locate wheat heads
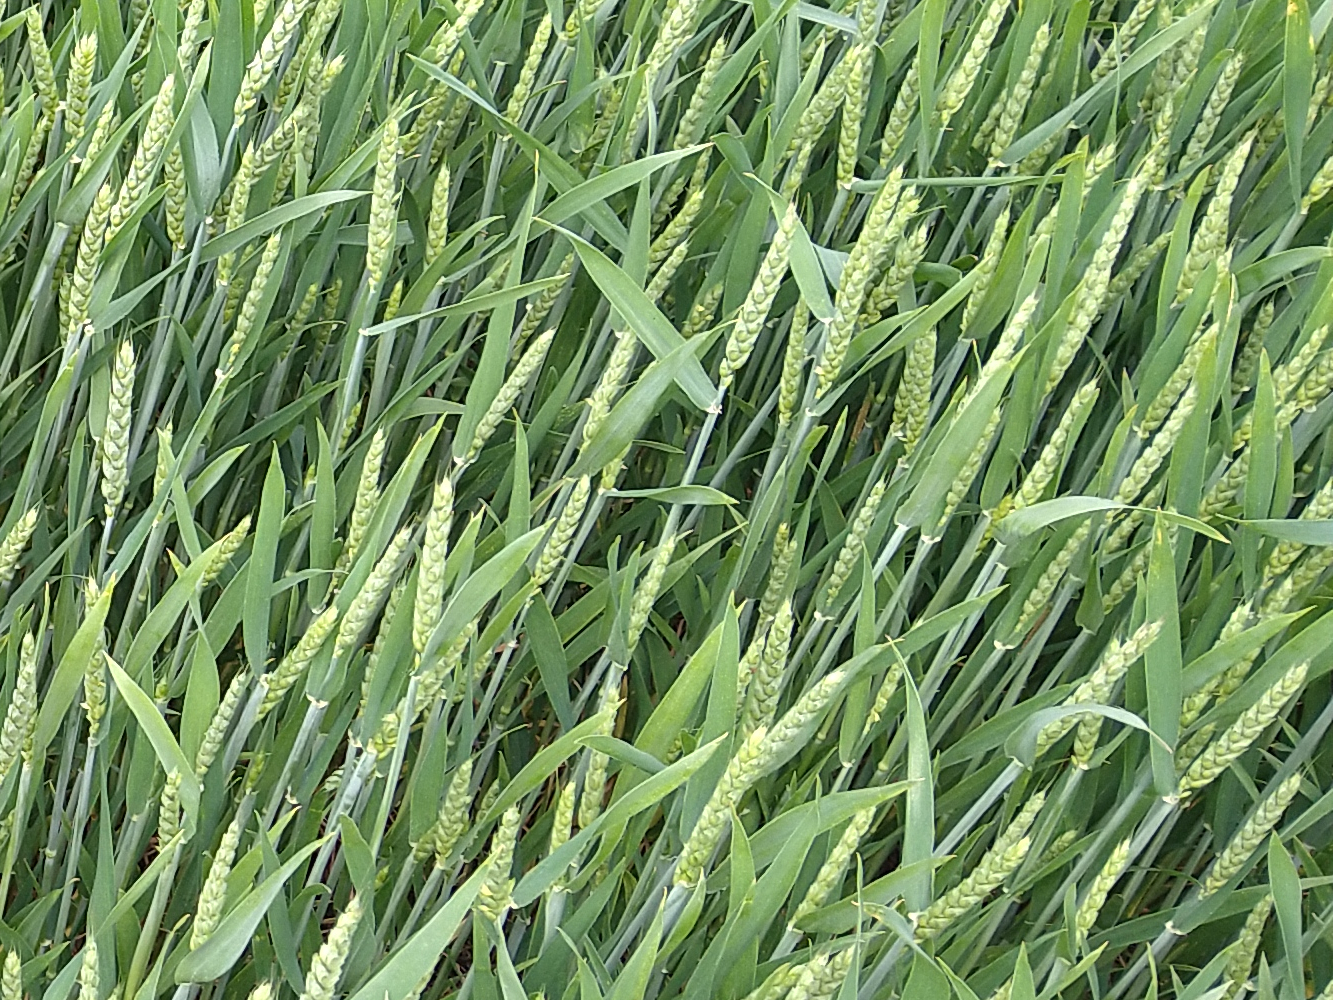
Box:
[1096,0,1138,29]
[1196,776,1298,894]
[503,11,552,130]
[179,0,207,74]
[0,512,39,590]
[99,338,135,500]
[761,522,788,569]
[1104,477,1164,550]
[682,284,726,335]
[1153,511,1176,560]
[1179,666,1306,794]
[110,75,174,238]
[969,87,1003,150]
[410,820,444,864]
[314,280,341,366]
[1098,0,1171,81]
[1308,166,1333,198]
[581,327,640,439]
[482,804,520,917]
[874,50,919,164]
[691,150,711,201]
[0,638,43,784]
[1269,547,1333,602]
[997,792,1045,855]
[2,951,27,1000]
[627,0,731,138]
[127,70,147,105]
[1142,6,1175,110]
[253,0,273,39]
[564,0,654,31]
[59,275,73,353]
[647,179,683,230]
[1101,539,1153,613]
[426,81,476,165]
[194,824,239,957]
[535,472,591,586]
[415,478,454,645]
[1224,303,1274,396]
[1233,328,1333,432]
[644,243,690,301]
[435,759,472,864]
[799,0,857,81]
[1167,721,1215,773]
[630,532,676,651]
[262,601,339,718]
[1068,637,1127,763]
[1075,836,1130,949]
[387,281,402,316]
[1022,147,1113,247]
[841,0,879,177]
[478,782,502,832]
[368,611,478,755]
[678,724,768,881]
[132,0,148,61]
[1182,56,1238,180]
[367,121,399,291]
[904,325,935,459]
[1016,520,1089,636]
[978,497,1016,554]
[1044,186,1146,404]
[587,88,622,139]
[76,102,114,188]
[215,146,251,287]
[929,0,1020,116]
[1218,894,1273,1000]
[1146,105,1177,176]
[1170,24,1208,114]
[1014,380,1096,510]
[196,671,246,785]
[740,607,792,740]
[1045,830,1077,858]
[863,235,930,312]
[972,298,1038,402]
[580,690,622,834]
[863,661,904,733]
[508,254,573,357]
[782,50,855,163]
[302,398,362,496]
[848,165,903,269]
[731,632,761,713]
[1176,257,1232,313]
[0,144,32,268]
[161,770,181,856]
[788,945,857,1000]
[792,805,878,935]
[404,55,464,152]
[64,37,97,132]
[725,956,829,1000]
[1291,980,1333,1000]
[214,64,338,231]
[154,428,171,500]
[1170,136,1254,298]
[26,9,56,119]
[424,163,449,264]
[994,26,1050,155]
[433,0,495,47]
[672,42,731,146]
[816,253,875,385]
[781,302,810,416]
[301,52,319,163]
[224,233,280,375]
[874,187,921,265]
[1095,232,1171,317]
[466,330,555,456]
[472,264,510,326]
[74,937,100,1000]
[71,188,116,330]
[875,0,932,36]
[911,839,1034,939]
[1215,580,1287,706]
[51,222,82,298]
[759,543,797,623]
[658,0,676,39]
[338,527,412,653]
[1198,416,1287,521]
[1260,485,1333,585]
[357,587,406,715]
[722,212,800,367]
[1105,384,1194,511]
[1128,325,1216,431]
[1254,102,1313,166]
[236,0,360,110]
[936,401,992,526]
[281,287,317,368]
[764,675,839,768]
[641,192,707,279]
[165,151,190,249]
[278,0,389,96]
[760,0,782,100]
[722,963,800,1000]
[890,338,912,433]
[961,209,1009,329]
[544,777,577,891]
[1296,348,1333,413]
[87,594,105,726]
[201,517,251,585]
[828,481,882,607]
[288,897,362,1000]
[787,144,810,187]
[1177,604,1251,718]
[1035,632,1160,751]
[346,431,385,566]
